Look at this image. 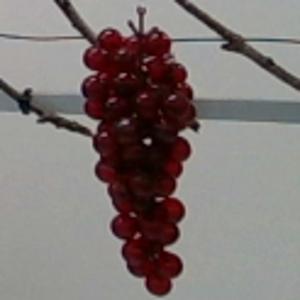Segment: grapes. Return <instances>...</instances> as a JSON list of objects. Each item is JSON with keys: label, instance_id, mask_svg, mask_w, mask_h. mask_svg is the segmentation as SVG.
<instances>
[{"label": "grapes", "instance_id": "01657485", "mask_svg": "<svg viewBox=\"0 0 300 300\" xmlns=\"http://www.w3.org/2000/svg\"><path fill=\"white\" fill-rule=\"evenodd\" d=\"M171 47L162 30L124 39L117 29H104L82 55L85 68L97 73L80 85L85 115L100 122L92 139L100 155L94 173L109 183L119 213L110 233L124 242L129 274L146 277V290L156 298L170 294L183 270L180 257L164 247L179 240L177 224L185 215L182 202L170 198L191 153L178 133L198 118L187 69L168 54Z\"/></svg>", "mask_w": 300, "mask_h": 300}]
</instances>
